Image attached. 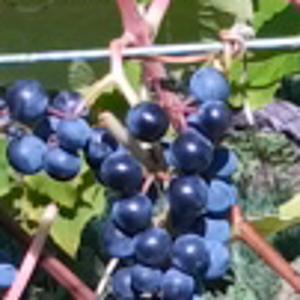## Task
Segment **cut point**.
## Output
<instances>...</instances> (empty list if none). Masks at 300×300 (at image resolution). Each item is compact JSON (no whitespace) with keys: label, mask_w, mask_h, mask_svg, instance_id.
<instances>
[{"label":"cut point","mask_w":300,"mask_h":300,"mask_svg":"<svg viewBox=\"0 0 300 300\" xmlns=\"http://www.w3.org/2000/svg\"><path fill=\"white\" fill-rule=\"evenodd\" d=\"M131 45V38L127 33L114 37L110 42V61L108 72L102 77L101 81L93 88L95 95H101L108 87L117 88L122 91L125 97L132 95L131 86L126 78L125 71L122 69L123 47Z\"/></svg>","instance_id":"cut-point-1"}]
</instances>
